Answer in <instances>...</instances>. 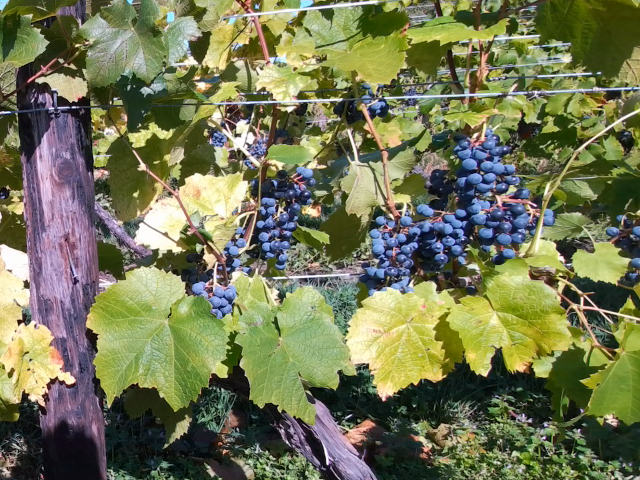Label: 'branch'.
<instances>
[{
    "mask_svg": "<svg viewBox=\"0 0 640 480\" xmlns=\"http://www.w3.org/2000/svg\"><path fill=\"white\" fill-rule=\"evenodd\" d=\"M491 46H492L491 42H488L486 44V46H485L484 54H483V56H482V58L480 60V63L478 65V67H477L475 75H474V77H473V79L471 81V84H470V92H476L475 86H476V83L478 82L480 74L482 73L483 67H484V65H485V63L487 61Z\"/></svg>",
    "mask_w": 640,
    "mask_h": 480,
    "instance_id": "3",
    "label": "branch"
},
{
    "mask_svg": "<svg viewBox=\"0 0 640 480\" xmlns=\"http://www.w3.org/2000/svg\"><path fill=\"white\" fill-rule=\"evenodd\" d=\"M253 23H254V28L255 31L257 33V38L261 43L262 46V51L264 52V61L268 62L269 61V50L267 48V44H266V40L264 39V33L262 31V27L259 25V20L257 17L252 18Z\"/></svg>",
    "mask_w": 640,
    "mask_h": 480,
    "instance_id": "4",
    "label": "branch"
},
{
    "mask_svg": "<svg viewBox=\"0 0 640 480\" xmlns=\"http://www.w3.org/2000/svg\"><path fill=\"white\" fill-rule=\"evenodd\" d=\"M255 221H256V216L252 215L251 219H250V221H249V223H248V225H247V227H246V229L244 231V236H243L244 240H247L249 238V234H250V232L252 230L253 225L255 224Z\"/></svg>",
    "mask_w": 640,
    "mask_h": 480,
    "instance_id": "7",
    "label": "branch"
},
{
    "mask_svg": "<svg viewBox=\"0 0 640 480\" xmlns=\"http://www.w3.org/2000/svg\"><path fill=\"white\" fill-rule=\"evenodd\" d=\"M272 118H273V121H272V124H271V131H270V134H269L268 139H267V145L268 146H271L272 142L274 141V136H275V133H276V127H277V124H278L277 105H272Z\"/></svg>",
    "mask_w": 640,
    "mask_h": 480,
    "instance_id": "6",
    "label": "branch"
},
{
    "mask_svg": "<svg viewBox=\"0 0 640 480\" xmlns=\"http://www.w3.org/2000/svg\"><path fill=\"white\" fill-rule=\"evenodd\" d=\"M447 59H448V63L450 65V68L452 70V75H453V81L456 82L455 83V88L460 91L463 92L464 88L460 85L458 81V72H457V68L455 65V62L453 61V57H452V50L448 49L447 50Z\"/></svg>",
    "mask_w": 640,
    "mask_h": 480,
    "instance_id": "5",
    "label": "branch"
},
{
    "mask_svg": "<svg viewBox=\"0 0 640 480\" xmlns=\"http://www.w3.org/2000/svg\"><path fill=\"white\" fill-rule=\"evenodd\" d=\"M356 106L357 109L360 111L361 115L364 117L366 123L368 124V127L371 131V134L374 138V142L376 147L382 152L381 154V159H382V163H383V170H382V175L384 177V181L386 182L387 185V199H386V203L387 206L389 208V211L392 213L393 216H395L396 219L400 218V212L398 211V209L396 208V205L393 201V187H392V182L389 179V175H388V161H387V157H388V150L381 144L380 140H379V136L377 134V131L375 129V126L372 123L371 118L369 117V114L367 113V107L363 102H356Z\"/></svg>",
    "mask_w": 640,
    "mask_h": 480,
    "instance_id": "2",
    "label": "branch"
},
{
    "mask_svg": "<svg viewBox=\"0 0 640 480\" xmlns=\"http://www.w3.org/2000/svg\"><path fill=\"white\" fill-rule=\"evenodd\" d=\"M107 118L110 121V123L112 124L113 128L115 129V131L117 132V134L119 135V137L121 138L122 142L129 147V149L131 150V152L134 154L135 158L138 160V162L140 163V165L138 166V171H144L145 173H147L151 178H153L154 180L158 181L162 187L169 191L170 193H172L177 202L179 203L183 214L185 215V217L187 218V221L189 222V224L191 225V227L194 230V233L196 234L197 238L203 242V244L212 252V254L217 257V262H221L222 266H223V272H224V276H225V280H226V285H229V277H228V273L226 270V263L225 260L222 258L221 255H219L212 246L209 245V243L200 235V233L197 230V227L195 226L194 222L191 220L188 212L186 211V208L183 204V202L181 201L178 193L173 190L172 188L168 187L163 180H161L159 177H157L156 175H154L149 169L148 166H146L144 164V162L142 161L141 157L138 156L137 151L133 148V146L124 138L123 134L121 133V131L119 130V128L117 127V125L115 124L113 118L110 115V109H107Z\"/></svg>",
    "mask_w": 640,
    "mask_h": 480,
    "instance_id": "1",
    "label": "branch"
}]
</instances>
